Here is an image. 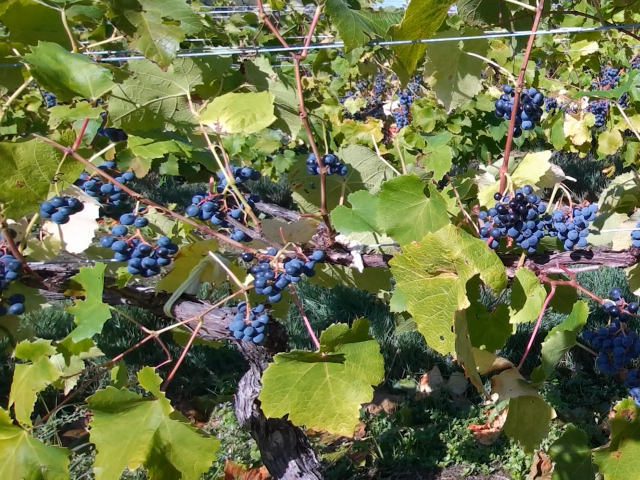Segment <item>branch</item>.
<instances>
[{"label":"branch","mask_w":640,"mask_h":480,"mask_svg":"<svg viewBox=\"0 0 640 480\" xmlns=\"http://www.w3.org/2000/svg\"><path fill=\"white\" fill-rule=\"evenodd\" d=\"M0 230L2 231V234L4 235V237L6 239L7 246L9 248H11L15 259H19L22 262L21 267L24 268V271H26L29 275H31L37 281L42 282L43 277L39 276L38 274H36L34 271H32L30 269V267H28L26 265L27 259L21 254L20 251L17 250L16 245L13 242L12 237L9 235V232L7 231L8 230V222H7L6 218L4 217V213H3V209L2 208H0Z\"/></svg>","instance_id":"obj_6"},{"label":"branch","mask_w":640,"mask_h":480,"mask_svg":"<svg viewBox=\"0 0 640 480\" xmlns=\"http://www.w3.org/2000/svg\"><path fill=\"white\" fill-rule=\"evenodd\" d=\"M259 13H260V15H261L262 19H263V20L266 22V24L268 25V27H269V29H270L271 33L275 36L276 40H277L281 45H283L284 47H289V43H288L286 40H284V39L280 36V34H279V33H278V31L276 30L275 26L273 25V22L268 18V16H267V14H266V12H265V10H264V8H263V7H260V8H259Z\"/></svg>","instance_id":"obj_8"},{"label":"branch","mask_w":640,"mask_h":480,"mask_svg":"<svg viewBox=\"0 0 640 480\" xmlns=\"http://www.w3.org/2000/svg\"><path fill=\"white\" fill-rule=\"evenodd\" d=\"M559 188H560V182L556 181L555 182V186H554L552 192L549 195V198H548V201H547V204H546V208L544 210V215L545 216L549 215V212L551 211V206H552L553 200H554L556 194L558 193Z\"/></svg>","instance_id":"obj_9"},{"label":"branch","mask_w":640,"mask_h":480,"mask_svg":"<svg viewBox=\"0 0 640 480\" xmlns=\"http://www.w3.org/2000/svg\"><path fill=\"white\" fill-rule=\"evenodd\" d=\"M30 135L33 138H37V139L41 140L42 142L46 143L47 145H49L51 147L62 149L63 153L67 152L71 157L76 158V160L78 162L83 163L84 165L88 166L90 169H92L94 172L98 173L105 180H107L108 182L112 183L114 186L119 187L120 189H123L126 193H128L129 195L134 197L136 200H138L139 202H142L145 206H149V207L154 208L155 210H159V211L165 212L168 215L176 217L180 221H183L184 223H186L188 225H191L193 227L204 229V230L210 232L211 234L215 235L216 237H218V238H220L222 240H225V241L229 242L232 245L240 247L244 251H247L250 254H253L258 260H262L263 259V256L261 255V253L259 251H256L255 249H252L251 247L246 246L244 243L239 242L237 240H234L231 237L218 232L217 230L213 229L211 226L203 224V223L195 222L193 220H190V219L186 218L185 216L181 215L180 213H178L176 211L170 210L169 208H167L165 206L157 205L156 203H154L152 201H148L145 197L140 196L139 194L134 192L132 189H130L125 184L115 180L114 178H112L111 176L106 174L102 169L98 168L96 165H94L89 160L81 157L79 153H75L67 145L51 141L47 137H44L42 134L35 133L34 131H31Z\"/></svg>","instance_id":"obj_1"},{"label":"branch","mask_w":640,"mask_h":480,"mask_svg":"<svg viewBox=\"0 0 640 480\" xmlns=\"http://www.w3.org/2000/svg\"><path fill=\"white\" fill-rule=\"evenodd\" d=\"M255 285L254 284H248L238 290H235L229 294H227L226 296H224L221 300H219L218 302H216L215 304L212 305L211 308L204 310V312L199 315L198 317H193L190 318L188 320H176L170 324L165 325L164 327L158 328L156 330H154L152 333L148 334L146 337L135 341L131 346H129L128 348H126L123 352H121L120 354L111 357L109 359L110 363H114L117 362L118 360L126 357L129 353H131L134 349H136L138 346L148 342L150 339L154 338L155 336L166 332L169 329L175 328L178 325H184V324H188V323H193L195 320H202L205 316H207L209 313H211L212 311L216 310L217 308H219L220 306H222L223 304H225L228 300L232 299L235 296H238L244 292H247L248 290L254 289Z\"/></svg>","instance_id":"obj_4"},{"label":"branch","mask_w":640,"mask_h":480,"mask_svg":"<svg viewBox=\"0 0 640 480\" xmlns=\"http://www.w3.org/2000/svg\"><path fill=\"white\" fill-rule=\"evenodd\" d=\"M535 39V35L534 36H530L526 45V53L524 55V58L522 60L521 66H520V71L518 74V78H517V82H516V89H515V93H514V99H513V105H512V109H511V115H510V127L508 129L507 132V140H506V147H505V152H504V159L501 163V169H500V177H499V192L503 193L504 189H505V178L508 172V165L507 163L509 162V155H510V150H511V143H512V134L513 131L515 129V118H516V112H517V107H518V101H519V96H520V92H521V84L523 81V77L525 74V69H526V65L527 62L530 58L531 55V47L533 44V41Z\"/></svg>","instance_id":"obj_3"},{"label":"branch","mask_w":640,"mask_h":480,"mask_svg":"<svg viewBox=\"0 0 640 480\" xmlns=\"http://www.w3.org/2000/svg\"><path fill=\"white\" fill-rule=\"evenodd\" d=\"M544 8H545V1H544V0H541V1H540L539 9H538V11H537V15H536L535 23H534V25H533V27H532V30H538V27H539V25H540V21H541V18H542V14H543V12H544Z\"/></svg>","instance_id":"obj_10"},{"label":"branch","mask_w":640,"mask_h":480,"mask_svg":"<svg viewBox=\"0 0 640 480\" xmlns=\"http://www.w3.org/2000/svg\"><path fill=\"white\" fill-rule=\"evenodd\" d=\"M289 54L292 56L294 63H295V72H294V76L296 77V92H297V96L299 99V103H300V111H301V120H302V124L303 127L305 129L306 135H307V139L308 142L310 143V146L312 148V152L316 158L317 161V166L321 172V184L320 187L321 189V216L323 218V222L325 223V226L328 230V246L332 247L333 246V237H332V226L331 223L328 219L327 216V212H328V208H327V202H328V194H327V184H326V169L324 167V165L322 164V159H321V155L317 149L316 143L312 137V133H311V129L310 126L308 124V119H307V113H306V109H305V101H304V96L302 94V89H301V75H300V61L299 58L296 54V52H289Z\"/></svg>","instance_id":"obj_2"},{"label":"branch","mask_w":640,"mask_h":480,"mask_svg":"<svg viewBox=\"0 0 640 480\" xmlns=\"http://www.w3.org/2000/svg\"><path fill=\"white\" fill-rule=\"evenodd\" d=\"M538 279L545 283H550L554 285H569L570 287L576 286L577 288L585 292L588 296L593 298L600 305L605 304V301L603 299H601L598 295H596L594 292H592L590 289H588L586 286H584L582 283L576 280H556V279L545 277L543 276V274L540 277H538Z\"/></svg>","instance_id":"obj_7"},{"label":"branch","mask_w":640,"mask_h":480,"mask_svg":"<svg viewBox=\"0 0 640 480\" xmlns=\"http://www.w3.org/2000/svg\"><path fill=\"white\" fill-rule=\"evenodd\" d=\"M203 137L206 140V142L208 143V146L210 148V150L212 151L217 164L219 165V168L221 169V172L223 174V176L226 178V182L229 185L230 188H232L234 194L236 195V197L238 198V200L240 201L241 205L246 209V211L249 213V215L252 217V220L254 221V224L256 226V231L259 232H263L261 223L256 215V213L251 209V207L248 205V203L246 202V200L243 198L242 194L240 193V191L238 190L237 185L235 184L234 180L232 179V177L229 175L222 159L221 156L219 155V152L217 151V149L215 148V145L213 144V141L211 139V137L209 136V134L207 132L203 133Z\"/></svg>","instance_id":"obj_5"}]
</instances>
